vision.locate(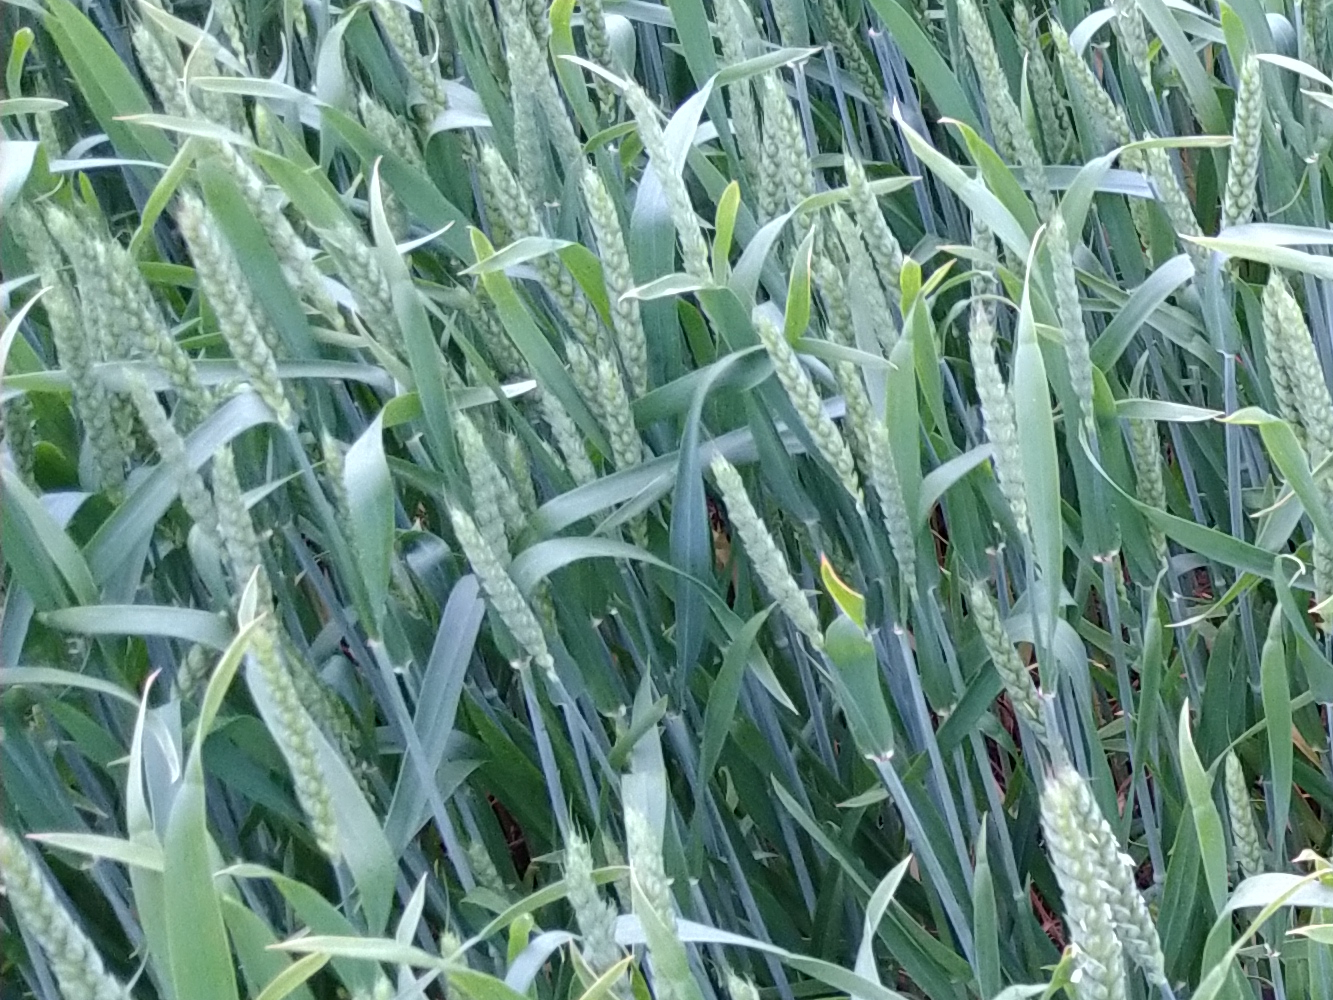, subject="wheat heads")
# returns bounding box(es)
[461,292,533,381]
[970,314,1031,532]
[5,393,39,494]
[1128,415,1167,555]
[1276,281,1333,477]
[454,416,519,557]
[813,258,857,353]
[756,324,859,497]
[1267,281,1333,527]
[481,152,607,355]
[509,58,547,195]
[451,514,549,667]
[104,330,138,460]
[869,421,919,593]
[751,0,808,47]
[45,293,131,501]
[565,343,609,426]
[375,0,450,107]
[459,128,477,162]
[386,0,412,39]
[212,447,272,620]
[1048,223,1094,416]
[177,200,293,420]
[1040,782,1129,1000]
[0,838,163,1000]
[279,0,308,31]
[663,167,715,285]
[471,0,507,86]
[817,0,887,108]
[110,243,156,312]
[582,171,650,396]
[256,105,279,156]
[127,379,224,535]
[379,170,410,242]
[969,586,1046,730]
[1070,954,1114,1000]
[770,78,817,230]
[1113,122,1153,256]
[505,435,537,514]
[116,0,181,63]
[623,85,718,284]
[1053,25,1114,136]
[634,861,698,1000]
[251,633,340,853]
[384,108,418,173]
[710,460,822,645]
[760,106,784,223]
[1304,0,1328,68]
[1261,288,1300,436]
[17,205,71,296]
[408,78,436,118]
[563,834,625,981]
[963,12,1017,165]
[1077,0,1149,73]
[1065,763,1165,966]
[598,363,649,536]
[533,580,558,637]
[325,229,408,360]
[467,843,504,897]
[484,450,530,545]
[1002,94,1049,211]
[835,211,899,353]
[567,0,617,108]
[541,391,596,484]
[73,246,106,360]
[627,813,670,880]
[215,225,302,395]
[173,0,245,55]
[442,936,490,1000]
[229,158,357,339]
[839,360,874,474]
[323,438,355,541]
[35,90,61,159]
[360,96,427,173]
[1314,525,1333,614]
[1054,86,1076,164]
[190,42,232,129]
[172,641,221,701]
[717,0,760,189]
[843,157,905,319]
[524,36,585,173]
[478,162,511,250]
[131,29,193,140]
[94,245,206,397]
[535,254,613,358]
[1225,751,1263,882]
[1014,6,1069,160]
[482,149,549,256]
[970,214,998,328]
[815,0,850,23]
[327,749,379,810]
[1223,58,1264,229]
[1145,140,1207,262]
